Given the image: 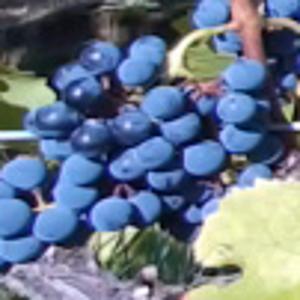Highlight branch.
Wrapping results in <instances>:
<instances>
[{
  "mask_svg": "<svg viewBox=\"0 0 300 300\" xmlns=\"http://www.w3.org/2000/svg\"><path fill=\"white\" fill-rule=\"evenodd\" d=\"M230 13L238 23L245 42V54L253 60H261L266 53L265 31L257 0H231Z\"/></svg>",
  "mask_w": 300,
  "mask_h": 300,
  "instance_id": "obj_1",
  "label": "branch"
}]
</instances>
